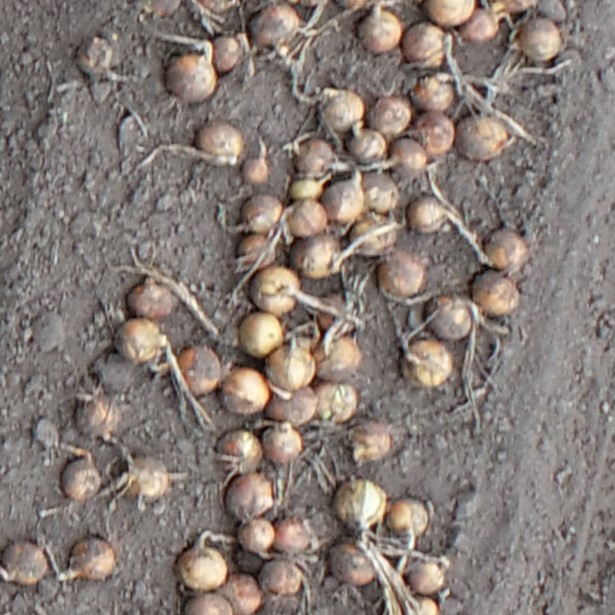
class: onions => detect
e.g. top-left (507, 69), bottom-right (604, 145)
top-left (199, 2), bottom-right (239, 13)
top-left (78, 393), bottom-right (121, 434)
top-left (315, 382), bottom-right (356, 422)
top-left (348, 127), bottom-right (387, 163)
top-left (129, 458), bottom-right (168, 499)
top-left (253, 267), bottom-right (297, 313)
top-left (239, 516), bottom-right (275, 552)
top-left (517, 18), bottom-right (559, 61)
top-left (76, 35), bottom-right (113, 72)
top-left (332, 0), bottom-right (370, 12)
top-left (489, 0), bottom-right (529, 17)
top-left (412, 72), bottom-right (454, 110)
top-left (431, 299), bottom-right (472, 339)
top-left (240, 193), bottom-right (281, 232)
top-left (482, 228), bottom-right (528, 273)
top-left (322, 176), bottom-right (366, 221)
top-left (288, 198), bottom-right (326, 236)
top-left (348, 417), bottom-right (400, 463)
top-left (424, 0), bottom-right (471, 27)
top-left (320, 334), bottom-right (362, 377)
top-left (408, 197), bottom-right (445, 230)
top-left (414, 593), bottom-right (442, 615)
top-left (461, 9), bottom-right (497, 46)
top-left (60, 459), bottom-right (102, 500)
top-left (259, 559), bottom-right (302, 598)
top-left (473, 272), bottom-right (517, 316)
top-left (114, 317), bottom-right (161, 363)
top-left (401, 24), bottom-right (444, 65)
top-left (294, 233), bottom-right (340, 278)
top-left (404, 338), bottom-right (453, 386)
top-left (319, 287), bottom-right (359, 330)
top-left (364, 178), bottom-right (399, 214)
top-left (261, 423), bottom-right (302, 464)
top-left (265, 387), bottom-right (317, 424)
top-left (328, 544), bottom-right (373, 586)
top-left (263, 343), bottom-right (315, 389)
top-left (144, 0), bottom-right (182, 14)
top-left (459, 114), bottom-right (509, 160)
top-left (359, 9), bottom-right (403, 51)
top-left (370, 96), bottom-right (412, 137)
top-left (4, 539), bottom-right (47, 586)
top-left (208, 36), bottom-right (242, 73)
top-left (182, 590), bottom-right (235, 615)
top-left (389, 136), bottom-right (428, 174)
top-left (196, 118), bottom-right (242, 161)
top-left (238, 311), bottom-right (283, 355)
top-left (378, 250), bottom-right (429, 297)
top-left (238, 152), bottom-right (272, 189)
top-left (179, 347), bottom-right (223, 393)
top-left (218, 429), bottom-right (262, 474)
top-left (165, 51), bottom-right (215, 100)
top-left (349, 217), bottom-right (399, 256)
top-left (332, 477), bottom-right (386, 527)
top-left (68, 536), bottom-right (115, 580)
top-left (288, 550), bottom-right (326, 591)
top-left (294, 136), bottom-right (336, 177)
top-left (384, 498), bottom-right (428, 538)
top-left (416, 112), bottom-right (454, 150)
top-left (288, 176), bottom-right (323, 202)
top-left (274, 514), bottom-right (314, 552)
top-left (406, 557), bottom-right (444, 592)
top-left (177, 539), bottom-right (226, 589)
top-left (222, 367), bottom-right (270, 415)
top-left (223, 573), bottom-right (262, 615)
top-left (224, 473), bottom-right (272, 518)
top-left (320, 91), bottom-right (363, 132)
top-left (130, 279), bottom-right (172, 321)
top-left (235, 230), bottom-right (271, 264)
top-left (250, 5), bottom-right (299, 47)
